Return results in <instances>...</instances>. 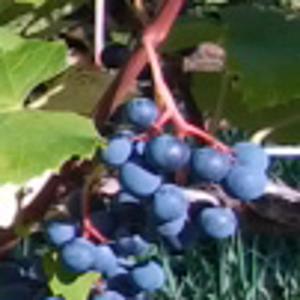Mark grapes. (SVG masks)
Returning a JSON list of instances; mask_svg holds the SVG:
<instances>
[{
	"instance_id": "3",
	"label": "grapes",
	"mask_w": 300,
	"mask_h": 300,
	"mask_svg": "<svg viewBox=\"0 0 300 300\" xmlns=\"http://www.w3.org/2000/svg\"><path fill=\"white\" fill-rule=\"evenodd\" d=\"M201 232L217 242L231 240L239 230V214L225 203L204 206L195 216Z\"/></svg>"
},
{
	"instance_id": "4",
	"label": "grapes",
	"mask_w": 300,
	"mask_h": 300,
	"mask_svg": "<svg viewBox=\"0 0 300 300\" xmlns=\"http://www.w3.org/2000/svg\"><path fill=\"white\" fill-rule=\"evenodd\" d=\"M127 115L134 129L149 131L158 123L159 108L149 98L133 97L127 103Z\"/></svg>"
},
{
	"instance_id": "1",
	"label": "grapes",
	"mask_w": 300,
	"mask_h": 300,
	"mask_svg": "<svg viewBox=\"0 0 300 300\" xmlns=\"http://www.w3.org/2000/svg\"><path fill=\"white\" fill-rule=\"evenodd\" d=\"M97 155L119 169L117 206L136 210L148 206L153 230L168 237L183 234L193 219L190 191L171 175L186 170L203 187L222 186L228 201L250 205L261 202L269 184L270 155L258 142L239 141L229 151L219 147L192 151L188 143L169 134L137 142L132 130L114 129Z\"/></svg>"
},
{
	"instance_id": "2",
	"label": "grapes",
	"mask_w": 300,
	"mask_h": 300,
	"mask_svg": "<svg viewBox=\"0 0 300 300\" xmlns=\"http://www.w3.org/2000/svg\"><path fill=\"white\" fill-rule=\"evenodd\" d=\"M101 235L113 238L107 245L93 238L79 236L77 226L70 220H47L43 236L48 245L57 250V261L70 275L79 276L95 271L104 277L102 290L92 294L91 300H129L136 292H153L166 281V271L159 261L127 262L143 257L150 247L146 233L131 234L121 218L97 210L92 215Z\"/></svg>"
}]
</instances>
